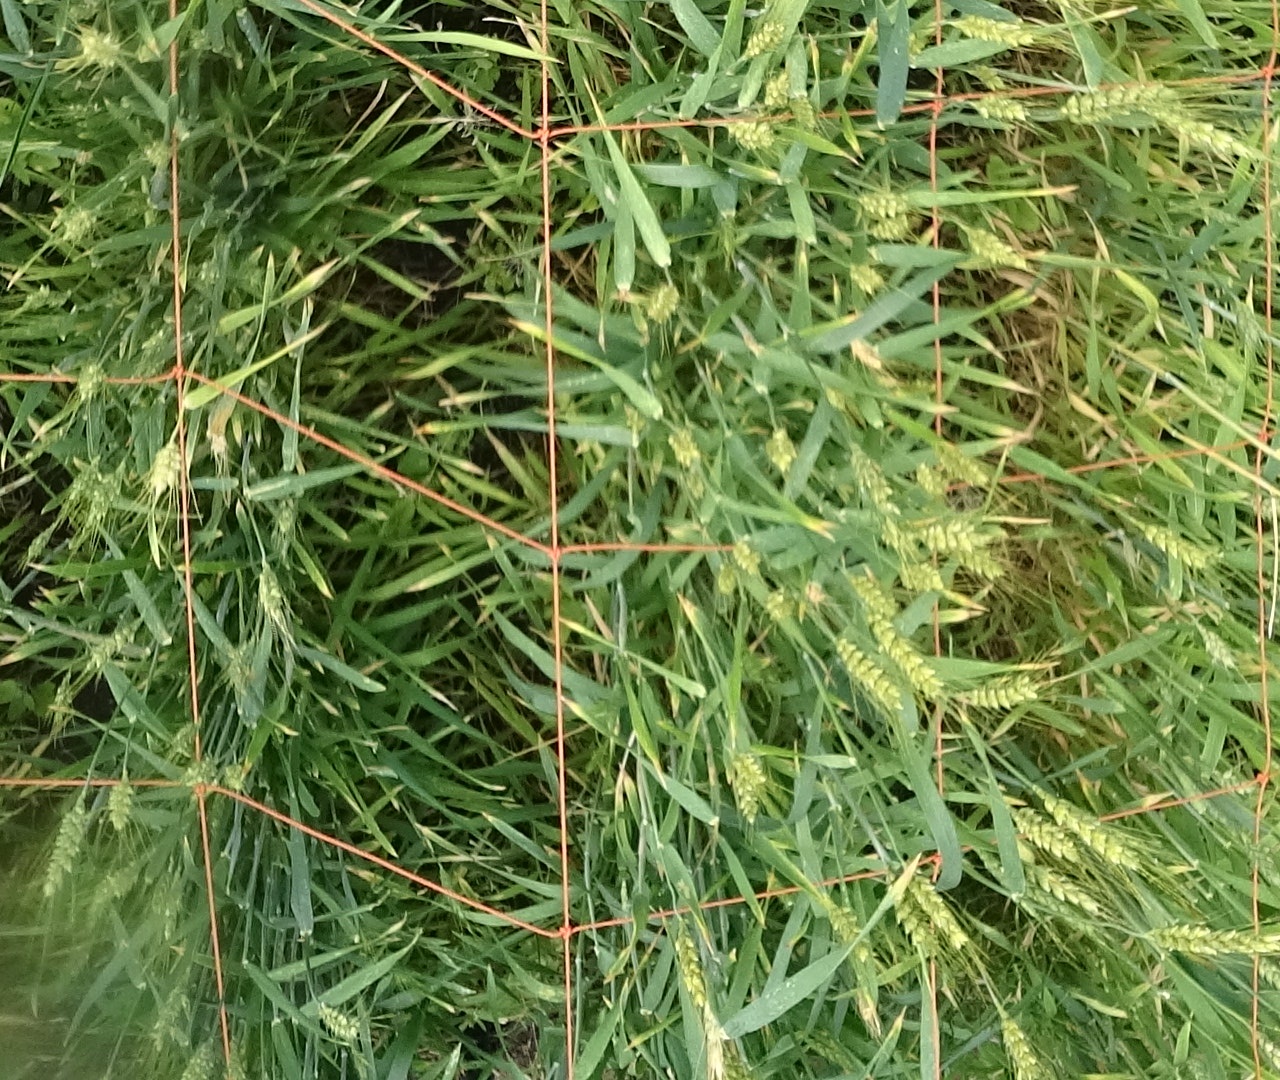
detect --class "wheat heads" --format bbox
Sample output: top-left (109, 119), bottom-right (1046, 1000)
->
top-left (313, 997), bottom-right (357, 1037)
top-left (858, 189), bottom-right (906, 210)
top-left (108, 781), bottom-right (129, 825)
top-left (947, 535), bottom-right (1014, 584)
top-left (722, 116), bottom-right (768, 153)
top-left (996, 1012), bottom-right (1038, 1071)
top-left (763, 71), bottom-right (790, 104)
top-left (994, 792), bottom-right (1073, 861)
top-left (735, 18), bottom-right (778, 68)
top-left (762, 427), bottom-right (791, 469)
top-left (90, 629), bottom-right (132, 662)
top-left (889, 894), bottom-right (942, 959)
top-left (250, 569), bottom-right (286, 625)
top-left (180, 763), bottom-right (209, 793)
top-left (186, 1042), bottom-right (228, 1078)
top-left (946, 672), bottom-right (1044, 707)
top-left (837, 641), bottom-right (901, 707)
top-left (928, 430), bottom-right (990, 492)
top-left (75, 359), bottom-right (109, 405)
top-left (1069, 79), bottom-right (1177, 114)
top-left (51, 804), bottom-right (82, 888)
top-left (844, 447), bottom-right (890, 507)
top-left (1018, 869), bottom-right (1100, 919)
top-left (668, 920), bottom-right (708, 1008)
top-left (954, 228), bottom-right (1021, 273)
top-left (869, 616), bottom-right (932, 693)
top-left (1156, 107), bottom-right (1248, 156)
top-left (152, 443), bottom-right (183, 495)
top-left (817, 889), bottom-right (864, 949)
top-left (901, 863), bottom-right (963, 944)
top-left (647, 289), bottom-right (678, 321)
top-left (150, 987), bottom-right (187, 1042)
top-left (77, 31), bottom-right (127, 65)
top-left (1039, 785), bottom-right (1155, 856)
top-left (912, 515), bottom-right (977, 548)
top-left (970, 92), bottom-right (1024, 124)
top-left (853, 574), bottom-right (894, 618)
top-left (724, 745), bottom-right (761, 820)
top-left (844, 257), bottom-right (883, 296)
top-left (60, 208), bottom-right (94, 242)
top-left (899, 552), bottom-right (938, 592)
top-left (728, 539), bottom-right (765, 579)
top-left (1145, 523), bottom-right (1207, 565)
top-left (666, 434), bottom-right (697, 464)
top-left (871, 216), bottom-right (909, 236)
top-left (92, 866), bottom-right (140, 925)
top-left (951, 9), bottom-right (1031, 48)
top-left (49, 685), bottom-right (72, 723)
top-left (82, 475), bottom-right (122, 535)
top-left (1139, 925), bottom-right (1280, 947)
